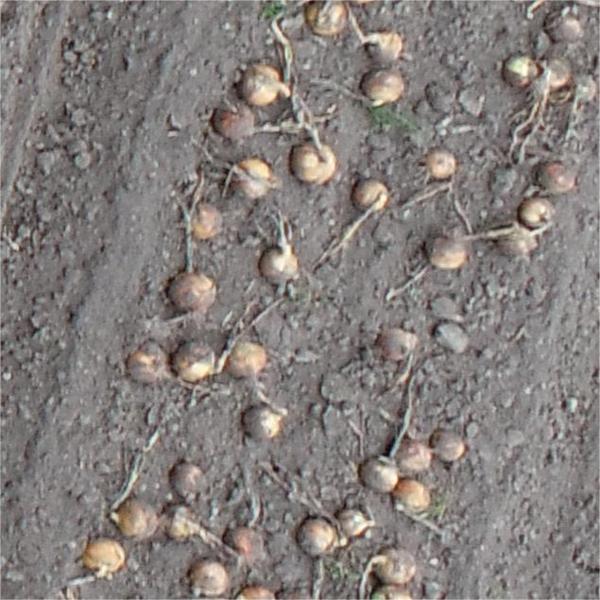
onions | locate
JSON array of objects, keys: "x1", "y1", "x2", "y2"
[
  {"x1": 430, "y1": 428, "x2": 463, "y2": 462},
  {"x1": 378, "y1": 325, "x2": 416, "y2": 362},
  {"x1": 243, "y1": 403, "x2": 283, "y2": 440},
  {"x1": 167, "y1": 460, "x2": 203, "y2": 497},
  {"x1": 540, "y1": 56, "x2": 573, "y2": 93},
  {"x1": 517, "y1": 194, "x2": 550, "y2": 226},
  {"x1": 359, "y1": 455, "x2": 397, "y2": 490},
  {"x1": 257, "y1": 244, "x2": 296, "y2": 282},
  {"x1": 304, "y1": 0, "x2": 350, "y2": 37},
  {"x1": 392, "y1": 478, "x2": 429, "y2": 513},
  {"x1": 227, "y1": 339, "x2": 265, "y2": 377},
  {"x1": 424, "y1": 149, "x2": 455, "y2": 179},
  {"x1": 127, "y1": 342, "x2": 163, "y2": 383},
  {"x1": 297, "y1": 516, "x2": 338, "y2": 556},
  {"x1": 536, "y1": 158, "x2": 573, "y2": 192},
  {"x1": 133, "y1": 342, "x2": 164, "y2": 365},
  {"x1": 174, "y1": 340, "x2": 213, "y2": 381},
  {"x1": 362, "y1": 68, "x2": 402, "y2": 105},
  {"x1": 572, "y1": 77, "x2": 595, "y2": 102},
  {"x1": 231, "y1": 154, "x2": 273, "y2": 199},
  {"x1": 187, "y1": 556, "x2": 232, "y2": 593},
  {"x1": 504, "y1": 52, "x2": 538, "y2": 85},
  {"x1": 427, "y1": 231, "x2": 465, "y2": 271},
  {"x1": 84, "y1": 536, "x2": 124, "y2": 573},
  {"x1": 500, "y1": 224, "x2": 535, "y2": 259},
  {"x1": 339, "y1": 505, "x2": 371, "y2": 540},
  {"x1": 350, "y1": 178, "x2": 388, "y2": 213},
  {"x1": 169, "y1": 269, "x2": 214, "y2": 312},
  {"x1": 367, "y1": 548, "x2": 412, "y2": 588},
  {"x1": 369, "y1": 583, "x2": 410, "y2": 600},
  {"x1": 241, "y1": 63, "x2": 281, "y2": 105},
  {"x1": 168, "y1": 509, "x2": 199, "y2": 538},
  {"x1": 117, "y1": 495, "x2": 159, "y2": 537},
  {"x1": 237, "y1": 582, "x2": 276, "y2": 600},
  {"x1": 214, "y1": 105, "x2": 252, "y2": 139},
  {"x1": 365, "y1": 29, "x2": 402, "y2": 64},
  {"x1": 227, "y1": 525, "x2": 263, "y2": 563},
  {"x1": 396, "y1": 439, "x2": 430, "y2": 475},
  {"x1": 291, "y1": 142, "x2": 333, "y2": 182},
  {"x1": 189, "y1": 205, "x2": 221, "y2": 237},
  {"x1": 549, "y1": 11, "x2": 583, "y2": 44}
]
